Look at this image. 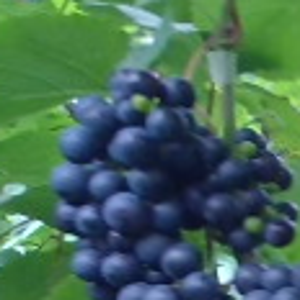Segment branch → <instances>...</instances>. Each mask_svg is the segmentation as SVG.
<instances>
[{"mask_svg": "<svg viewBox=\"0 0 300 300\" xmlns=\"http://www.w3.org/2000/svg\"><path fill=\"white\" fill-rule=\"evenodd\" d=\"M235 110H236V94L235 87L232 84H226L223 87L222 111L224 115L223 135L231 138L234 135L235 128Z\"/></svg>", "mask_w": 300, "mask_h": 300, "instance_id": "obj_2", "label": "branch"}, {"mask_svg": "<svg viewBox=\"0 0 300 300\" xmlns=\"http://www.w3.org/2000/svg\"><path fill=\"white\" fill-rule=\"evenodd\" d=\"M237 17V5L233 2L226 3L222 13V33L219 35V46L224 50H234L237 47Z\"/></svg>", "mask_w": 300, "mask_h": 300, "instance_id": "obj_1", "label": "branch"}]
</instances>
